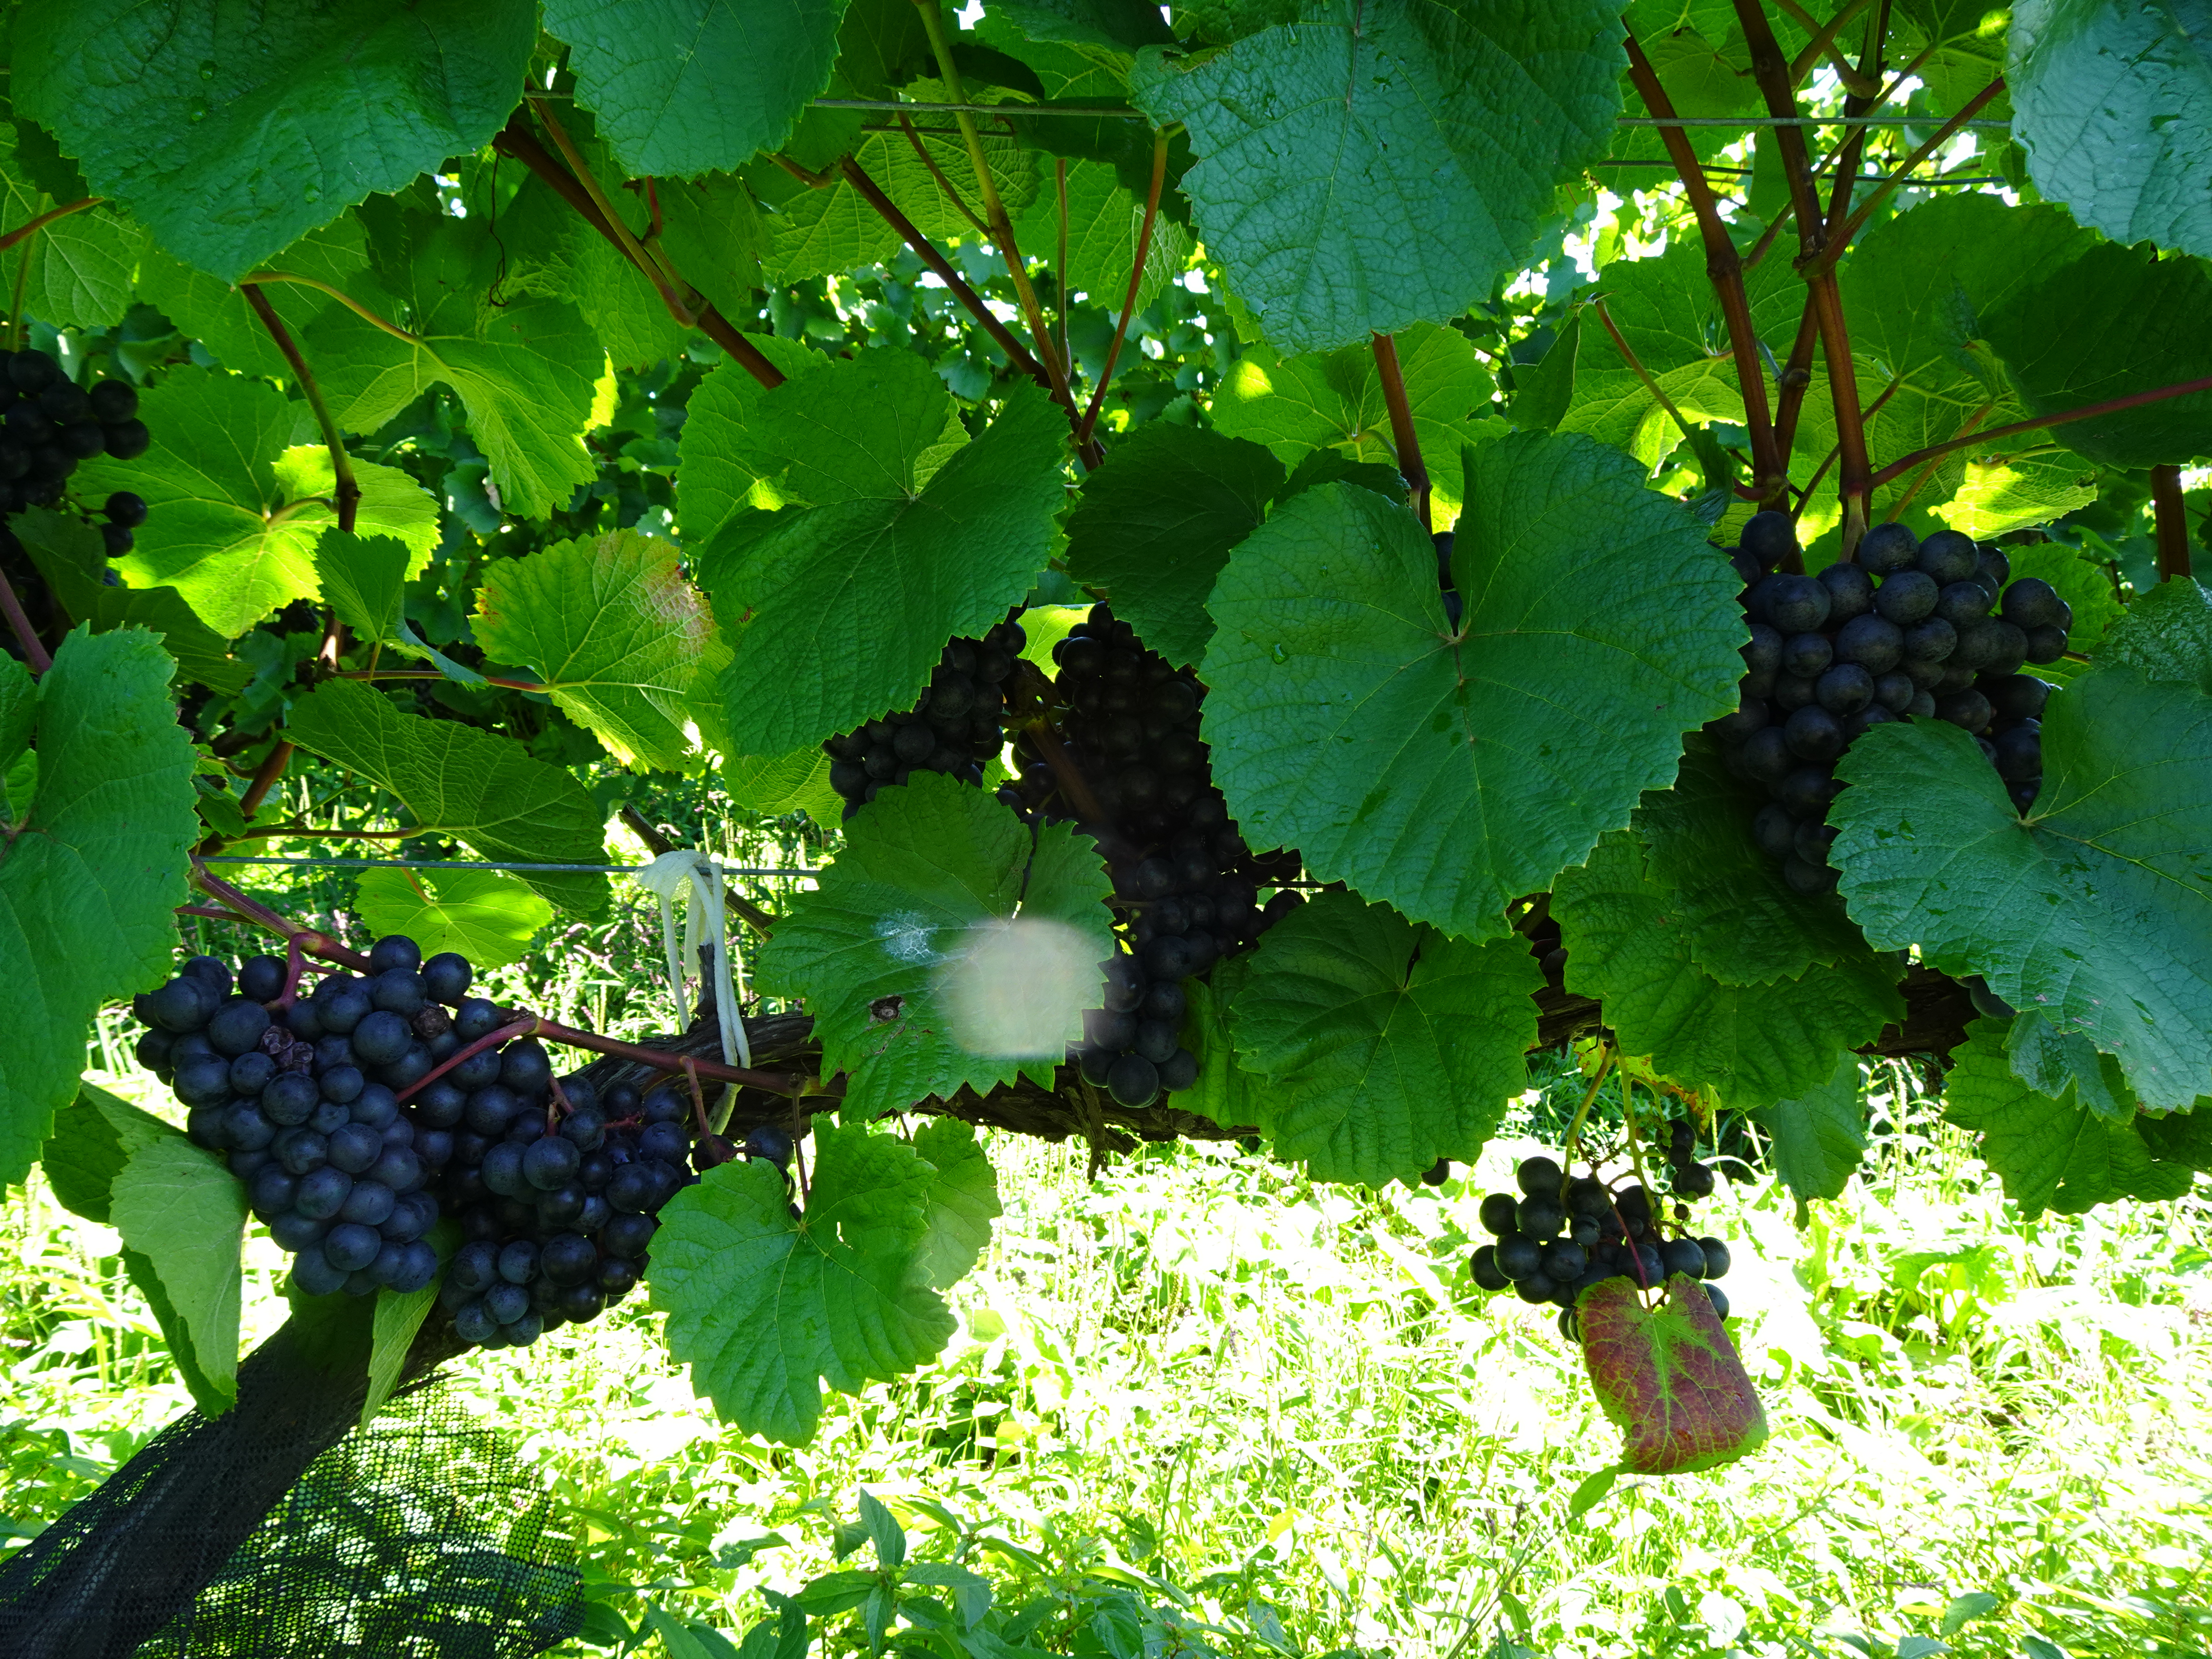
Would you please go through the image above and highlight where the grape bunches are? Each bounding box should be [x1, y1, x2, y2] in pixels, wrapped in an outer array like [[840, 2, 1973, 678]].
[[1422, 1157, 1450, 1185], [0, 491, 148, 685], [0, 349, 150, 517], [134, 955, 441, 1297], [1052, 602, 1248, 869], [1704, 509, 2071, 898], [1655, 1118, 1714, 1200], [1430, 532, 1455, 639], [995, 668, 1077, 851], [689, 1125, 802, 1225], [1065, 822, 1262, 1108], [1558, 1185, 1728, 1344], [1239, 848, 1304, 926], [1953, 674, 2061, 1025], [822, 592, 1031, 829], [1469, 1156, 1609, 1309], [439, 1075, 690, 1349], [312, 934, 551, 1218]]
